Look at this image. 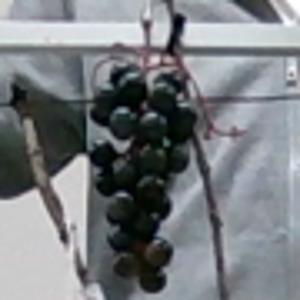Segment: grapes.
Returning a JSON list of instances; mask_svg holds the SVG:
<instances>
[{"instance_id": "grapes-1", "label": "grapes", "mask_w": 300, "mask_h": 300, "mask_svg": "<svg viewBox=\"0 0 300 300\" xmlns=\"http://www.w3.org/2000/svg\"><path fill=\"white\" fill-rule=\"evenodd\" d=\"M147 82L145 69L125 60L113 65L110 81L97 85L89 120L131 146L122 168L111 165L118 149L105 137L91 141L87 158L102 168L94 181L95 191L110 198L105 218L112 226L106 241L114 250L113 272L122 279L134 276L142 291L158 294L167 287L164 269L175 259L176 249L157 235L173 210L168 195L176 175L189 168L188 143L194 138L201 110L194 101L179 102L182 84L174 72L155 75L150 89Z\"/></svg>"}]
</instances>
